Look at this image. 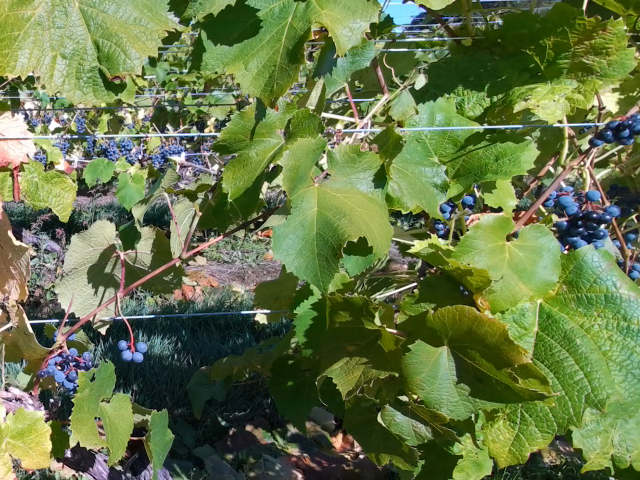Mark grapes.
I'll use <instances>...</instances> for the list:
<instances>
[{
  "label": "grapes",
  "mask_w": 640,
  "mask_h": 480,
  "mask_svg": "<svg viewBox=\"0 0 640 480\" xmlns=\"http://www.w3.org/2000/svg\"><path fill=\"white\" fill-rule=\"evenodd\" d=\"M576 190L573 186H562L560 194L554 190L548 200L543 203L546 208L555 206V200L565 208L567 215H573V219L568 221H557L555 227L558 229L557 241L561 245V251L566 249L565 245L572 248H581L593 244L596 249L604 246L603 240L608 238L609 230L600 228L602 225H609L613 217L621 215V207L617 204H609L605 212L599 214L594 210L580 211L581 204L573 200Z\"/></svg>",
  "instance_id": "01657485"
},
{
  "label": "grapes",
  "mask_w": 640,
  "mask_h": 480,
  "mask_svg": "<svg viewBox=\"0 0 640 480\" xmlns=\"http://www.w3.org/2000/svg\"><path fill=\"white\" fill-rule=\"evenodd\" d=\"M78 350L71 348L61 354H56L47 363V368H43L38 372L40 378L55 377V381L60 385H63L69 393H75L77 385V371L70 370V363L74 367H77L79 371H86L92 368V354L89 351H84L80 355L81 362L77 358Z\"/></svg>",
  "instance_id": "b958b902"
},
{
  "label": "grapes",
  "mask_w": 640,
  "mask_h": 480,
  "mask_svg": "<svg viewBox=\"0 0 640 480\" xmlns=\"http://www.w3.org/2000/svg\"><path fill=\"white\" fill-rule=\"evenodd\" d=\"M635 136H640V112H634L626 120L615 119L606 123L604 129L598 132V137H590L587 144L594 148H599L605 142L629 146L635 141Z\"/></svg>",
  "instance_id": "0513c4c2"
},
{
  "label": "grapes",
  "mask_w": 640,
  "mask_h": 480,
  "mask_svg": "<svg viewBox=\"0 0 640 480\" xmlns=\"http://www.w3.org/2000/svg\"><path fill=\"white\" fill-rule=\"evenodd\" d=\"M129 342L127 340H120L118 342L117 350L120 352V358L123 361L134 362L140 364L145 359V352L148 350V346L145 342H138L135 345V352L132 353L128 349Z\"/></svg>",
  "instance_id": "84f90ec7"
}]
</instances>
